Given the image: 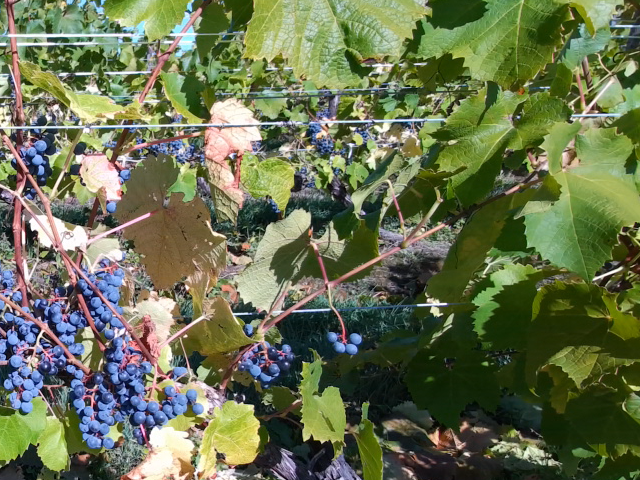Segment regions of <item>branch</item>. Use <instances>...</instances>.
I'll use <instances>...</instances> for the list:
<instances>
[{"instance_id":"obj_9","label":"branch","mask_w":640,"mask_h":480,"mask_svg":"<svg viewBox=\"0 0 640 480\" xmlns=\"http://www.w3.org/2000/svg\"><path fill=\"white\" fill-rule=\"evenodd\" d=\"M128 134H129V129L128 130H122L119 133V136H118L117 140L114 143L112 154H111V158H110V162L112 164H115L118 161V156H119V153H120L121 146H122V144H123V142L126 139V136Z\"/></svg>"},{"instance_id":"obj_8","label":"branch","mask_w":640,"mask_h":480,"mask_svg":"<svg viewBox=\"0 0 640 480\" xmlns=\"http://www.w3.org/2000/svg\"><path fill=\"white\" fill-rule=\"evenodd\" d=\"M213 0H204L193 13V15L185 22V24L180 28V31H188L192 25L198 20L203 11L209 6Z\"/></svg>"},{"instance_id":"obj_2","label":"branch","mask_w":640,"mask_h":480,"mask_svg":"<svg viewBox=\"0 0 640 480\" xmlns=\"http://www.w3.org/2000/svg\"><path fill=\"white\" fill-rule=\"evenodd\" d=\"M549 166V162L547 160H544L543 162H541L537 167H535L534 169H532L521 181H519L518 183L508 187L507 189L489 197L488 199L483 200L482 202L473 205L467 209H465L463 212L453 216L451 219H447L445 221H443L442 223H440L439 225H434L432 227H429L428 229L420 232L419 234H417L415 237L401 242L397 245L392 246L391 248H389L388 250L374 256L373 258H369L367 261H364L363 263L353 267L352 269L346 271L345 273H342L339 276L334 277L333 279H331L327 284L313 290L310 291L309 293L305 294L304 296H302L298 301H296L295 303H293L292 305H290L287 309H285L284 311H282L281 314L277 315L276 317L270 319L263 327L262 330L264 332H268L274 325L278 324L280 321H282L283 319H285L287 316L291 315L295 309H299L300 307H302L306 302H308L309 300L320 296L326 292H328L331 288H333L335 285L347 280L348 278L352 277L354 274L360 273L364 270H366L367 268H369L372 265H375L376 263L383 261L384 259L390 257L391 255L395 254L396 252L402 251L404 249H407L409 247H412L413 245H416L417 243H419L421 240H423L424 238L437 233V232H441L442 230H444L445 228H448L450 226H454L457 222L462 221L463 219H465L467 216H470L471 214L478 212L488 206H490L493 203H496L498 201H500L501 199L508 197L510 194L522 189L524 186H526L533 178H535L538 174H540L545 168H547Z\"/></svg>"},{"instance_id":"obj_4","label":"branch","mask_w":640,"mask_h":480,"mask_svg":"<svg viewBox=\"0 0 640 480\" xmlns=\"http://www.w3.org/2000/svg\"><path fill=\"white\" fill-rule=\"evenodd\" d=\"M10 56L12 63V71L14 74V94H15V103H16V124L18 126H22L24 124L23 119V101H22V92H21V72L19 69V61L17 54V39H10Z\"/></svg>"},{"instance_id":"obj_7","label":"branch","mask_w":640,"mask_h":480,"mask_svg":"<svg viewBox=\"0 0 640 480\" xmlns=\"http://www.w3.org/2000/svg\"><path fill=\"white\" fill-rule=\"evenodd\" d=\"M76 298L78 299V301H79V303H80V305L82 307L83 313H84V315H85V317L87 319L89 328H90V330H91V332H92V334H93V336H94V338H95V340L97 342V345L100 347L102 352H105L106 351V346L102 342L101 337H100V335H99V333H98V331H97V329H96V327L94 325L93 319H92L91 314H90V312L88 310L87 304H86L84 298L82 297V292L81 291L77 292Z\"/></svg>"},{"instance_id":"obj_1","label":"branch","mask_w":640,"mask_h":480,"mask_svg":"<svg viewBox=\"0 0 640 480\" xmlns=\"http://www.w3.org/2000/svg\"><path fill=\"white\" fill-rule=\"evenodd\" d=\"M0 134L3 140L6 142L8 148L12 152L14 159L17 161V175H16V188L15 191L8 187L7 185L0 183V188L4 191L8 192L11 196H13L14 201V211L12 215V226H13V237L16 251V266L18 268V288L21 292L22 303L24 306L28 305L26 289H25V279L23 274V265L21 264V249H20V222L22 215V206L25 210L30 214L33 220L40 225L48 239L53 243L54 246H57L59 254L62 258L63 264L67 270L68 277L72 282L76 281V278L73 274L72 267L79 273V275L87 281V283L94 289L96 295L103 300L106 306L109 307L110 311L119 317L121 322L126 326L127 330L133 336V339L136 341L138 346L143 350L146 357L149 359L151 365L155 369L158 374L163 372L161 365L159 364L157 358L152 353L151 349L145 343V341L141 338L139 332L134 329L131 323L126 319L123 314H120L116 311V309L110 305V303L106 300L104 295L101 293L100 289L97 288L89 277L85 274L84 270L81 268L82 266V258L83 252L78 250L75 255V261L70 257L69 253L63 248L55 222L53 220V216L51 213V208L48 202L47 197L44 192L40 189L36 179L33 175H31L30 171L27 169V166L24 161L21 160L20 157V148L23 146V131H16V147H14L13 143L9 139L5 130H0ZM25 176L30 180L35 192L39 195L41 200L43 201L44 208L46 210V216L48 218V222L50 224L52 233L50 232L47 225L44 221L37 216L34 210L29 206V204L22 198L18 193L20 191L21 185L24 183Z\"/></svg>"},{"instance_id":"obj_5","label":"branch","mask_w":640,"mask_h":480,"mask_svg":"<svg viewBox=\"0 0 640 480\" xmlns=\"http://www.w3.org/2000/svg\"><path fill=\"white\" fill-rule=\"evenodd\" d=\"M181 40H182L181 36H176L175 39L172 41V44L169 45L159 57L153 73L149 76L144 87L141 89L140 95L138 97V101L140 103H143L145 101L149 90L152 88L153 84L155 83V80L161 74L166 60L172 54V52L177 48Z\"/></svg>"},{"instance_id":"obj_11","label":"branch","mask_w":640,"mask_h":480,"mask_svg":"<svg viewBox=\"0 0 640 480\" xmlns=\"http://www.w3.org/2000/svg\"><path fill=\"white\" fill-rule=\"evenodd\" d=\"M100 206V200L98 198H95L93 200L90 212H89V216H88V221H87V225L89 227H92L95 223V218H96V214L98 211V208Z\"/></svg>"},{"instance_id":"obj_10","label":"branch","mask_w":640,"mask_h":480,"mask_svg":"<svg viewBox=\"0 0 640 480\" xmlns=\"http://www.w3.org/2000/svg\"><path fill=\"white\" fill-rule=\"evenodd\" d=\"M14 4L15 0L7 1V21L11 33L17 32V26L14 19Z\"/></svg>"},{"instance_id":"obj_6","label":"branch","mask_w":640,"mask_h":480,"mask_svg":"<svg viewBox=\"0 0 640 480\" xmlns=\"http://www.w3.org/2000/svg\"><path fill=\"white\" fill-rule=\"evenodd\" d=\"M253 349V346L251 344H248L246 346H244L242 349H240L232 358L229 368L226 371L225 376L223 377L221 383H220V389L222 391H225L227 389L228 383L230 382L236 368L238 365L239 360L248 352H250Z\"/></svg>"},{"instance_id":"obj_3","label":"branch","mask_w":640,"mask_h":480,"mask_svg":"<svg viewBox=\"0 0 640 480\" xmlns=\"http://www.w3.org/2000/svg\"><path fill=\"white\" fill-rule=\"evenodd\" d=\"M0 300L3 301L4 303H6L10 308H12L15 312H18L19 314H21L25 319L36 323L37 325H39L42 329H44L49 336L52 338L53 341H55L57 343V345L59 347H61L65 353V355L74 363L76 364L79 368H81L83 371H85V373L87 375L91 374V370L82 362H80L77 358H75L72 353L69 351L68 346L62 342V340L57 337L53 330L46 325L42 320L33 317L32 315L26 313L22 308L18 307L15 303H13L11 300H9L7 297H5L3 294H0Z\"/></svg>"}]
</instances>
